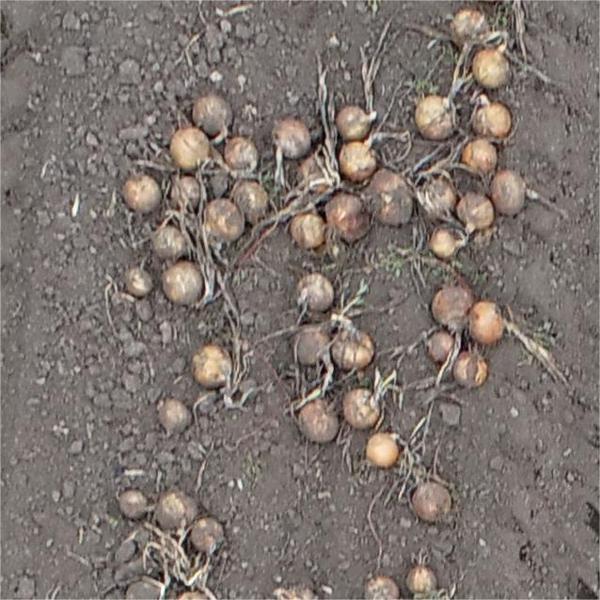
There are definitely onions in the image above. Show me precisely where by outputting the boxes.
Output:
[325,192,368,238]
[408,480,448,520]
[414,94,454,138]
[363,170,411,222]
[289,212,324,247]
[232,179,269,219]
[472,101,512,136]
[222,136,257,172]
[159,260,203,304]
[428,226,458,256]
[468,300,504,342]
[470,47,508,87]
[364,572,400,599]
[405,563,435,593]
[452,352,487,386]
[304,164,335,195]
[295,397,334,441]
[343,388,379,426]
[460,137,496,172]
[431,283,472,325]
[488,170,525,213]
[330,332,372,369]
[125,265,150,297]
[186,516,220,550]
[271,116,311,158]
[175,587,209,600]
[293,326,329,369]
[158,398,191,429]
[190,345,227,386]
[119,172,162,212]
[155,490,194,531]
[456,193,493,230]
[295,272,332,312]
[169,175,202,209]
[339,142,376,180]
[191,94,230,135]
[363,432,398,466]
[169,127,209,167]
[450,6,485,41]
[338,103,373,138]
[153,223,188,258]
[414,176,456,218]
[202,197,245,239]
[118,487,146,516]
[423,329,456,363]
